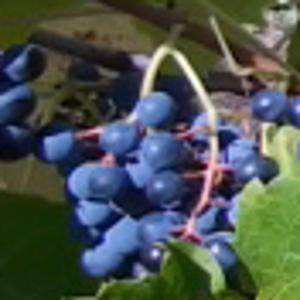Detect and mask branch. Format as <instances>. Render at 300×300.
I'll use <instances>...</instances> for the list:
<instances>
[{"instance_id": "30e6481e", "label": "branch", "mask_w": 300, "mask_h": 300, "mask_svg": "<svg viewBox=\"0 0 300 300\" xmlns=\"http://www.w3.org/2000/svg\"><path fill=\"white\" fill-rule=\"evenodd\" d=\"M100 3L166 32H169L175 23H181L184 26V31L180 36L181 39L199 48L213 51L218 57L225 55V49L211 30L178 14L147 3L144 0H100Z\"/></svg>"}, {"instance_id": "325d2c04", "label": "branch", "mask_w": 300, "mask_h": 300, "mask_svg": "<svg viewBox=\"0 0 300 300\" xmlns=\"http://www.w3.org/2000/svg\"><path fill=\"white\" fill-rule=\"evenodd\" d=\"M224 46L229 48V53L241 68H259L270 72H281L283 70L281 63H275L271 59H266L264 56L231 38L224 40Z\"/></svg>"}]
</instances>
